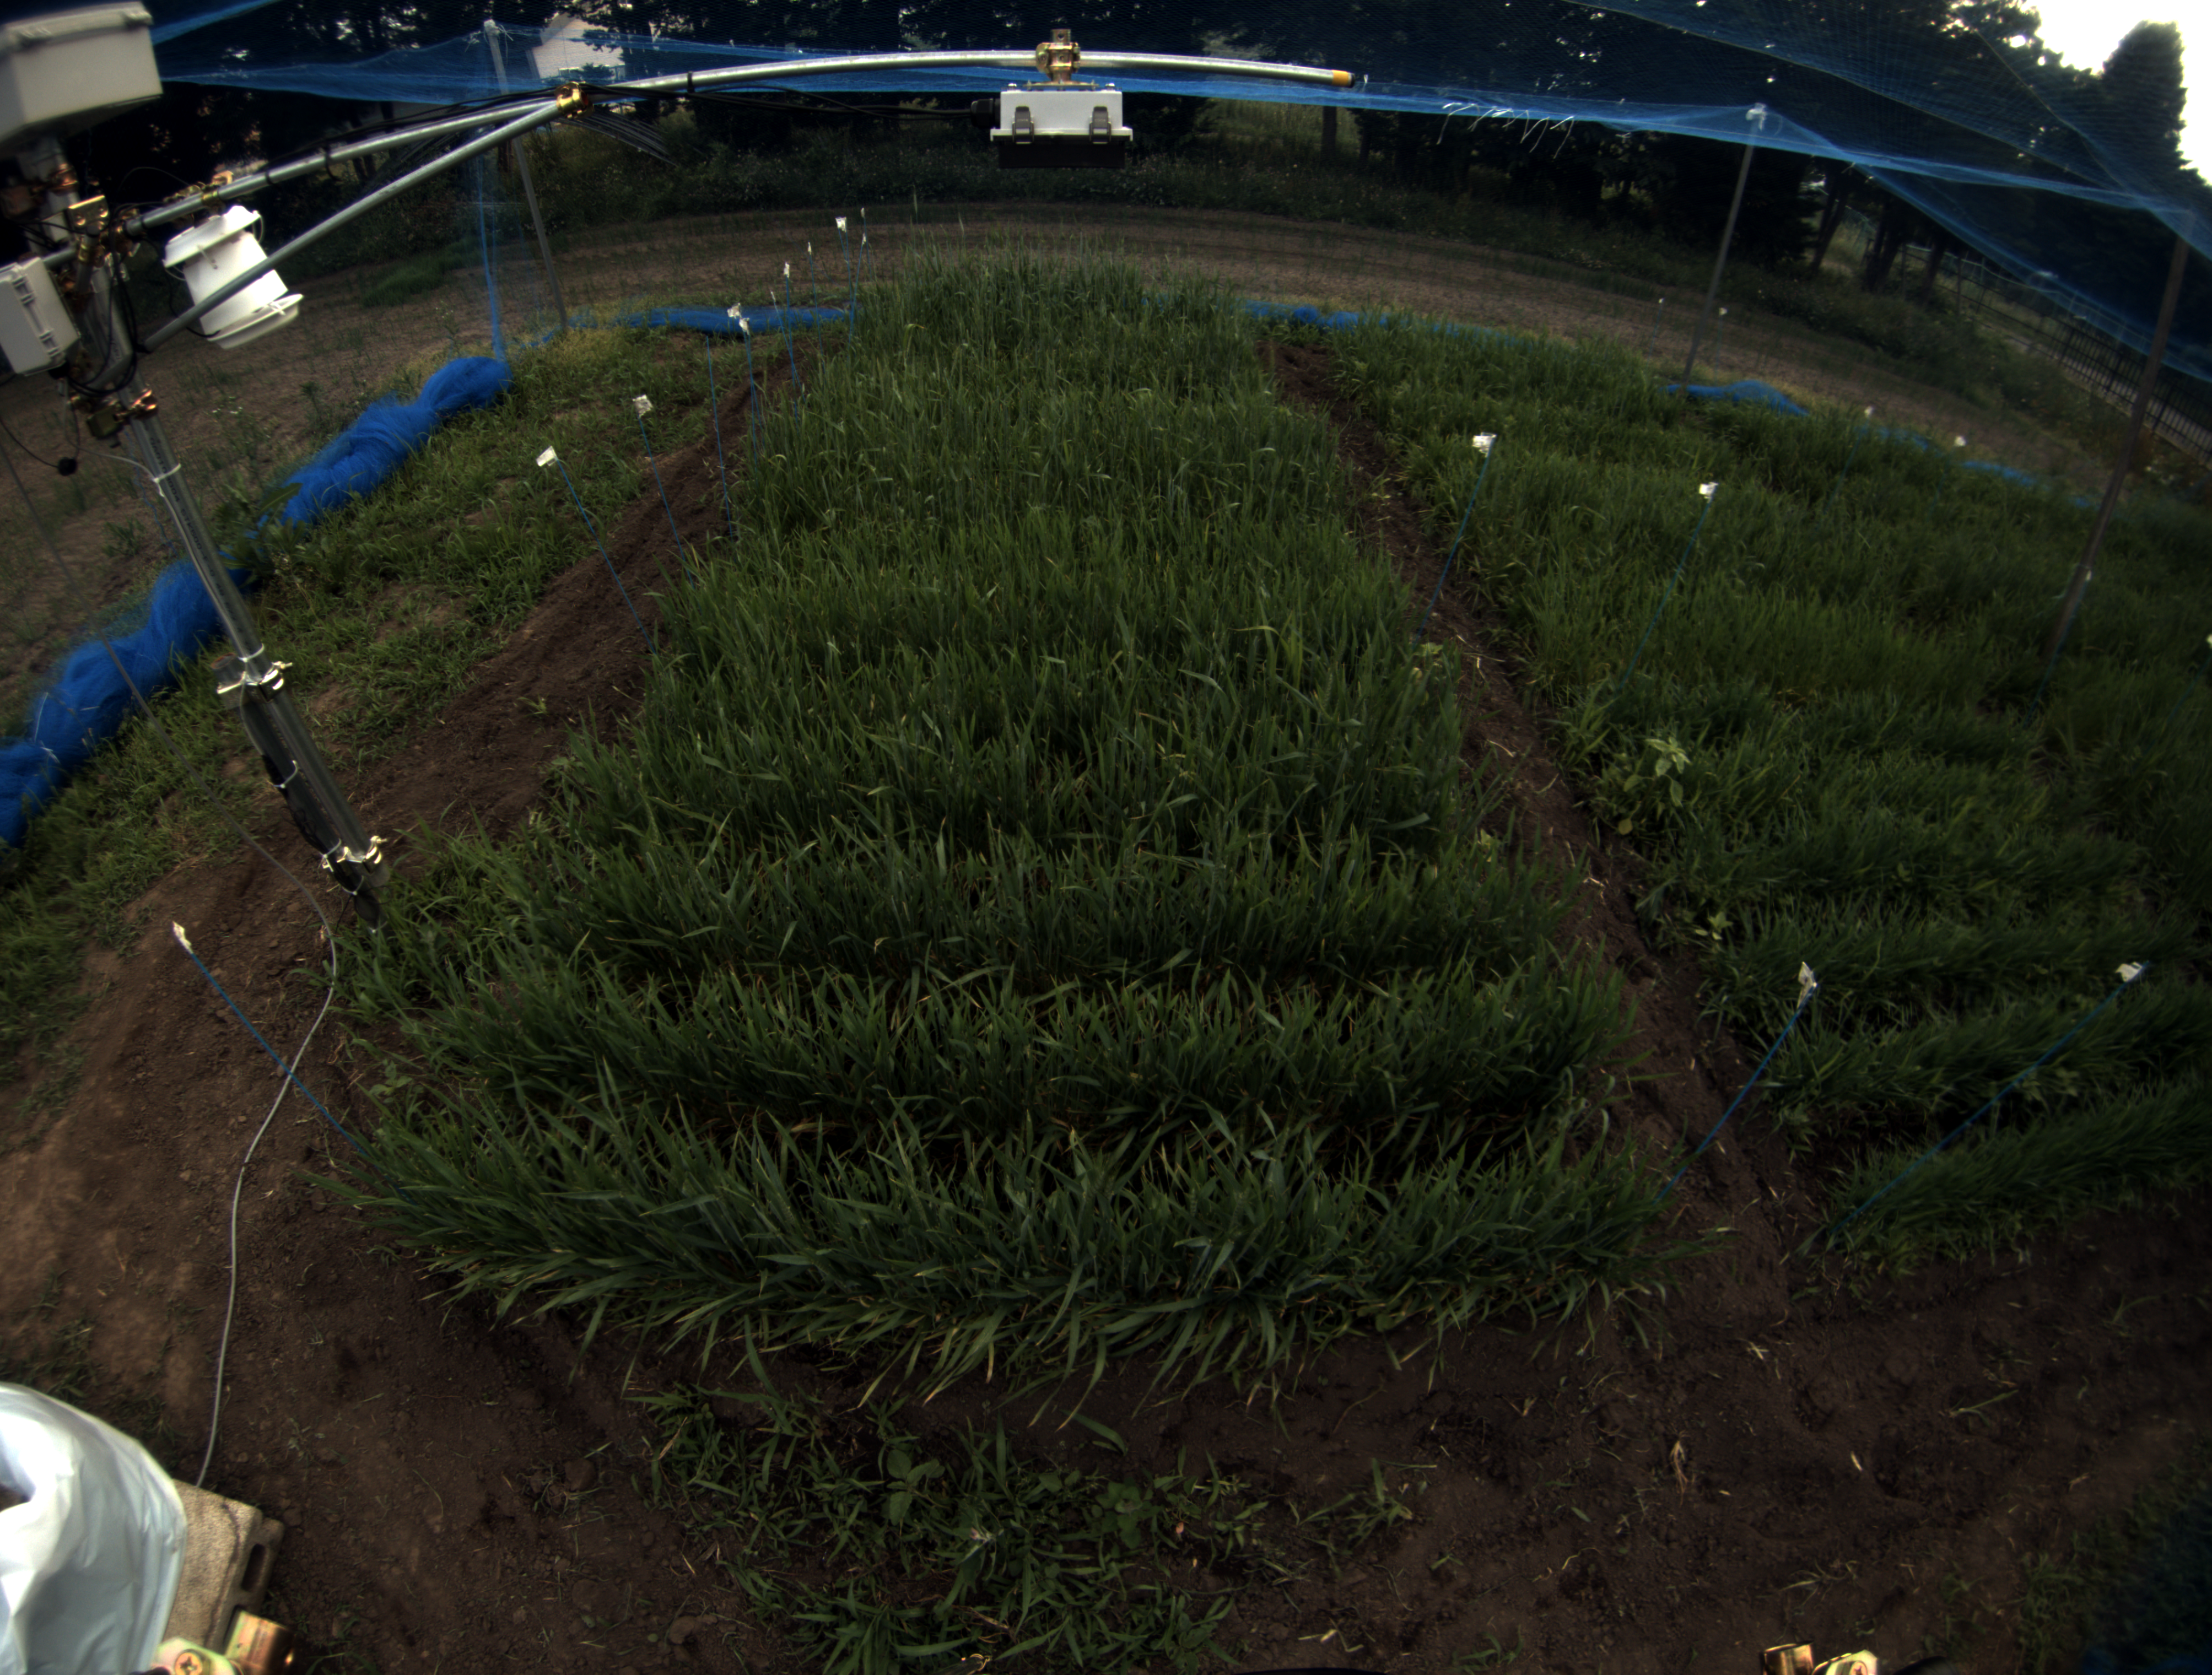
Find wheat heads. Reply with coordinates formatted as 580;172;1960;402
1125;844;1132;883
776;1193;795;1224
1103;1176;1115;1199
1018;837;1024;863
645;802;659;844
891;741;901;767
1073;400;1079;423
1256;567;1262;590
1795;787;1803;795
684;1178;698;1196
737;643;745;665
1145;739;1150;764
1320;673;1334;715
724;902;734;924
1892;1065;1921;1081
935;358;941;382
1135;750;1141;778
1104;410;1109;425
1336;641;1346;666
1269;416;1275;439
1102;266;1107;291
1003;578;1010;610
1131;518;1139;533
762;613;770;645
1159;500;1162;517
1214;632;1225;663
1867;507;1887;537
953;739;958;756
1066;1225;1080;1250
985;903;990;916
766;567;773;583
677;840;697;878
912;362;916;381
1386;717;1400;751
929;549;936;562
823;399;830;416
1159;572;1167;597
1121;694;1129;728
1103;384;1108;404
1246;367;1254;382
1179;570;1183;587
1034;1171;1040;1200
1145;896;1152;914
1185;644;1192;671
1148;603;1155;621
992;408;1000;423
503;848;512;864
1450;737;1463;770
1131;637;1137;662
1163;450;1172;469
1004;715;1017;752
1361;674;1367;692
674;875;679;891
896;577;901;593
1116;580;1125;604
989;259;994;273
891;699;902;735
1570;1098;1584;1114
1370;720;1378;743
942;458;946;468
810;1257;831;1275
907;1185;927;1222
1278;1127;1289;1157
550;842;567;879
1072;437;1075;449
1081;648;1085;660
950;688;956;725
1233;1188;1250;1218
1245;665;1255;694
885;803;896;855
724;654;734;678
1197;560;1204;576
922;1164;929;1190
906;336;911;353
1236;1133;1244;1161
612;770;634;809
951;351;958;375
831;372;836;391
1087;1170;1105;1202
611;1172;632;1195
1036;1050;1046;1057
714;1184;724;1201
863;458;874;472
936;685;945;711
1108;1048;1113;1070
1323;821;1333;860
1828;593;1835;606
514;1156;532;1186
901;276;910;317
1045;361;1050;384
604;1116;630;1154
743;653;754;675
1006;1174;1014;1195
1231;703;1240;723
773;678;781;704
882;364;888;378
893;866;897;883
1270;348;1275;370
1255;731;1262;749
839;393;846;420
1232;565;1239;589
894;285;901;303
1213;849;1221;884
886;834;899;859
651;1159;677;1186
1012;1026;1015;1036
1243;706;1250;722
827;366;831;388
983;1230;990;1247
1041;1040;1073;1050
1263;804;1270;848
957;373;963;398
1075;431;1079;450
1665;639;1668;653
1179;410;1188;432
1190;1187;1198;1216
1141;506;1146;519
1435;729;1446;758
1014;1140;1025;1166
1195;707;1201;746
1945;1026;1956;1043
427;929;436;955
1182;312;1185;332
845;373;853;398
861;399;867;425
1233;848;1239;869
1163;381;1169;404
788;732;795;758
818;362;823;386
1249;1223;1266;1239
1346;728;1359;753
1051;364;1057;385
1376;726;1387;752
1351;695;1365;715
1168;494;1171;506
878;371;885;399
1065;522;1072;540
1214;813;1221;849
988;836;997;866
1638;466;1650;488
1841;794;1852;809
763;369;767;387
791;424;797;442
1170;381;1175;402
